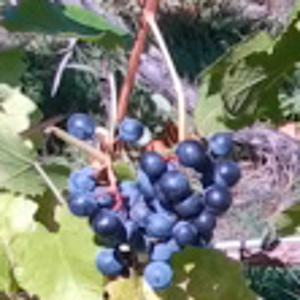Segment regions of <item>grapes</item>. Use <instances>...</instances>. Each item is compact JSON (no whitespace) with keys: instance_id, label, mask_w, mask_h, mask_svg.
<instances>
[{"instance_id":"obj_1","label":"grapes","mask_w":300,"mask_h":300,"mask_svg":"<svg viewBox=\"0 0 300 300\" xmlns=\"http://www.w3.org/2000/svg\"><path fill=\"white\" fill-rule=\"evenodd\" d=\"M232 132L213 134L206 148L182 140L169 158L155 150L140 153L137 181L96 179L83 168L68 179L67 206L76 218L90 217V232L100 240L117 236L124 246L147 242L144 284L162 293L176 281L168 261L188 245L207 247L218 215L231 205L230 188L244 179L234 161L221 159L234 147Z\"/></svg>"},{"instance_id":"obj_2","label":"grapes","mask_w":300,"mask_h":300,"mask_svg":"<svg viewBox=\"0 0 300 300\" xmlns=\"http://www.w3.org/2000/svg\"><path fill=\"white\" fill-rule=\"evenodd\" d=\"M95 267L106 277L121 276L126 270L125 256L116 248H104L94 256Z\"/></svg>"},{"instance_id":"obj_3","label":"grapes","mask_w":300,"mask_h":300,"mask_svg":"<svg viewBox=\"0 0 300 300\" xmlns=\"http://www.w3.org/2000/svg\"><path fill=\"white\" fill-rule=\"evenodd\" d=\"M66 130L77 140L90 141L96 134V123L86 113H72L67 119Z\"/></svg>"}]
</instances>
